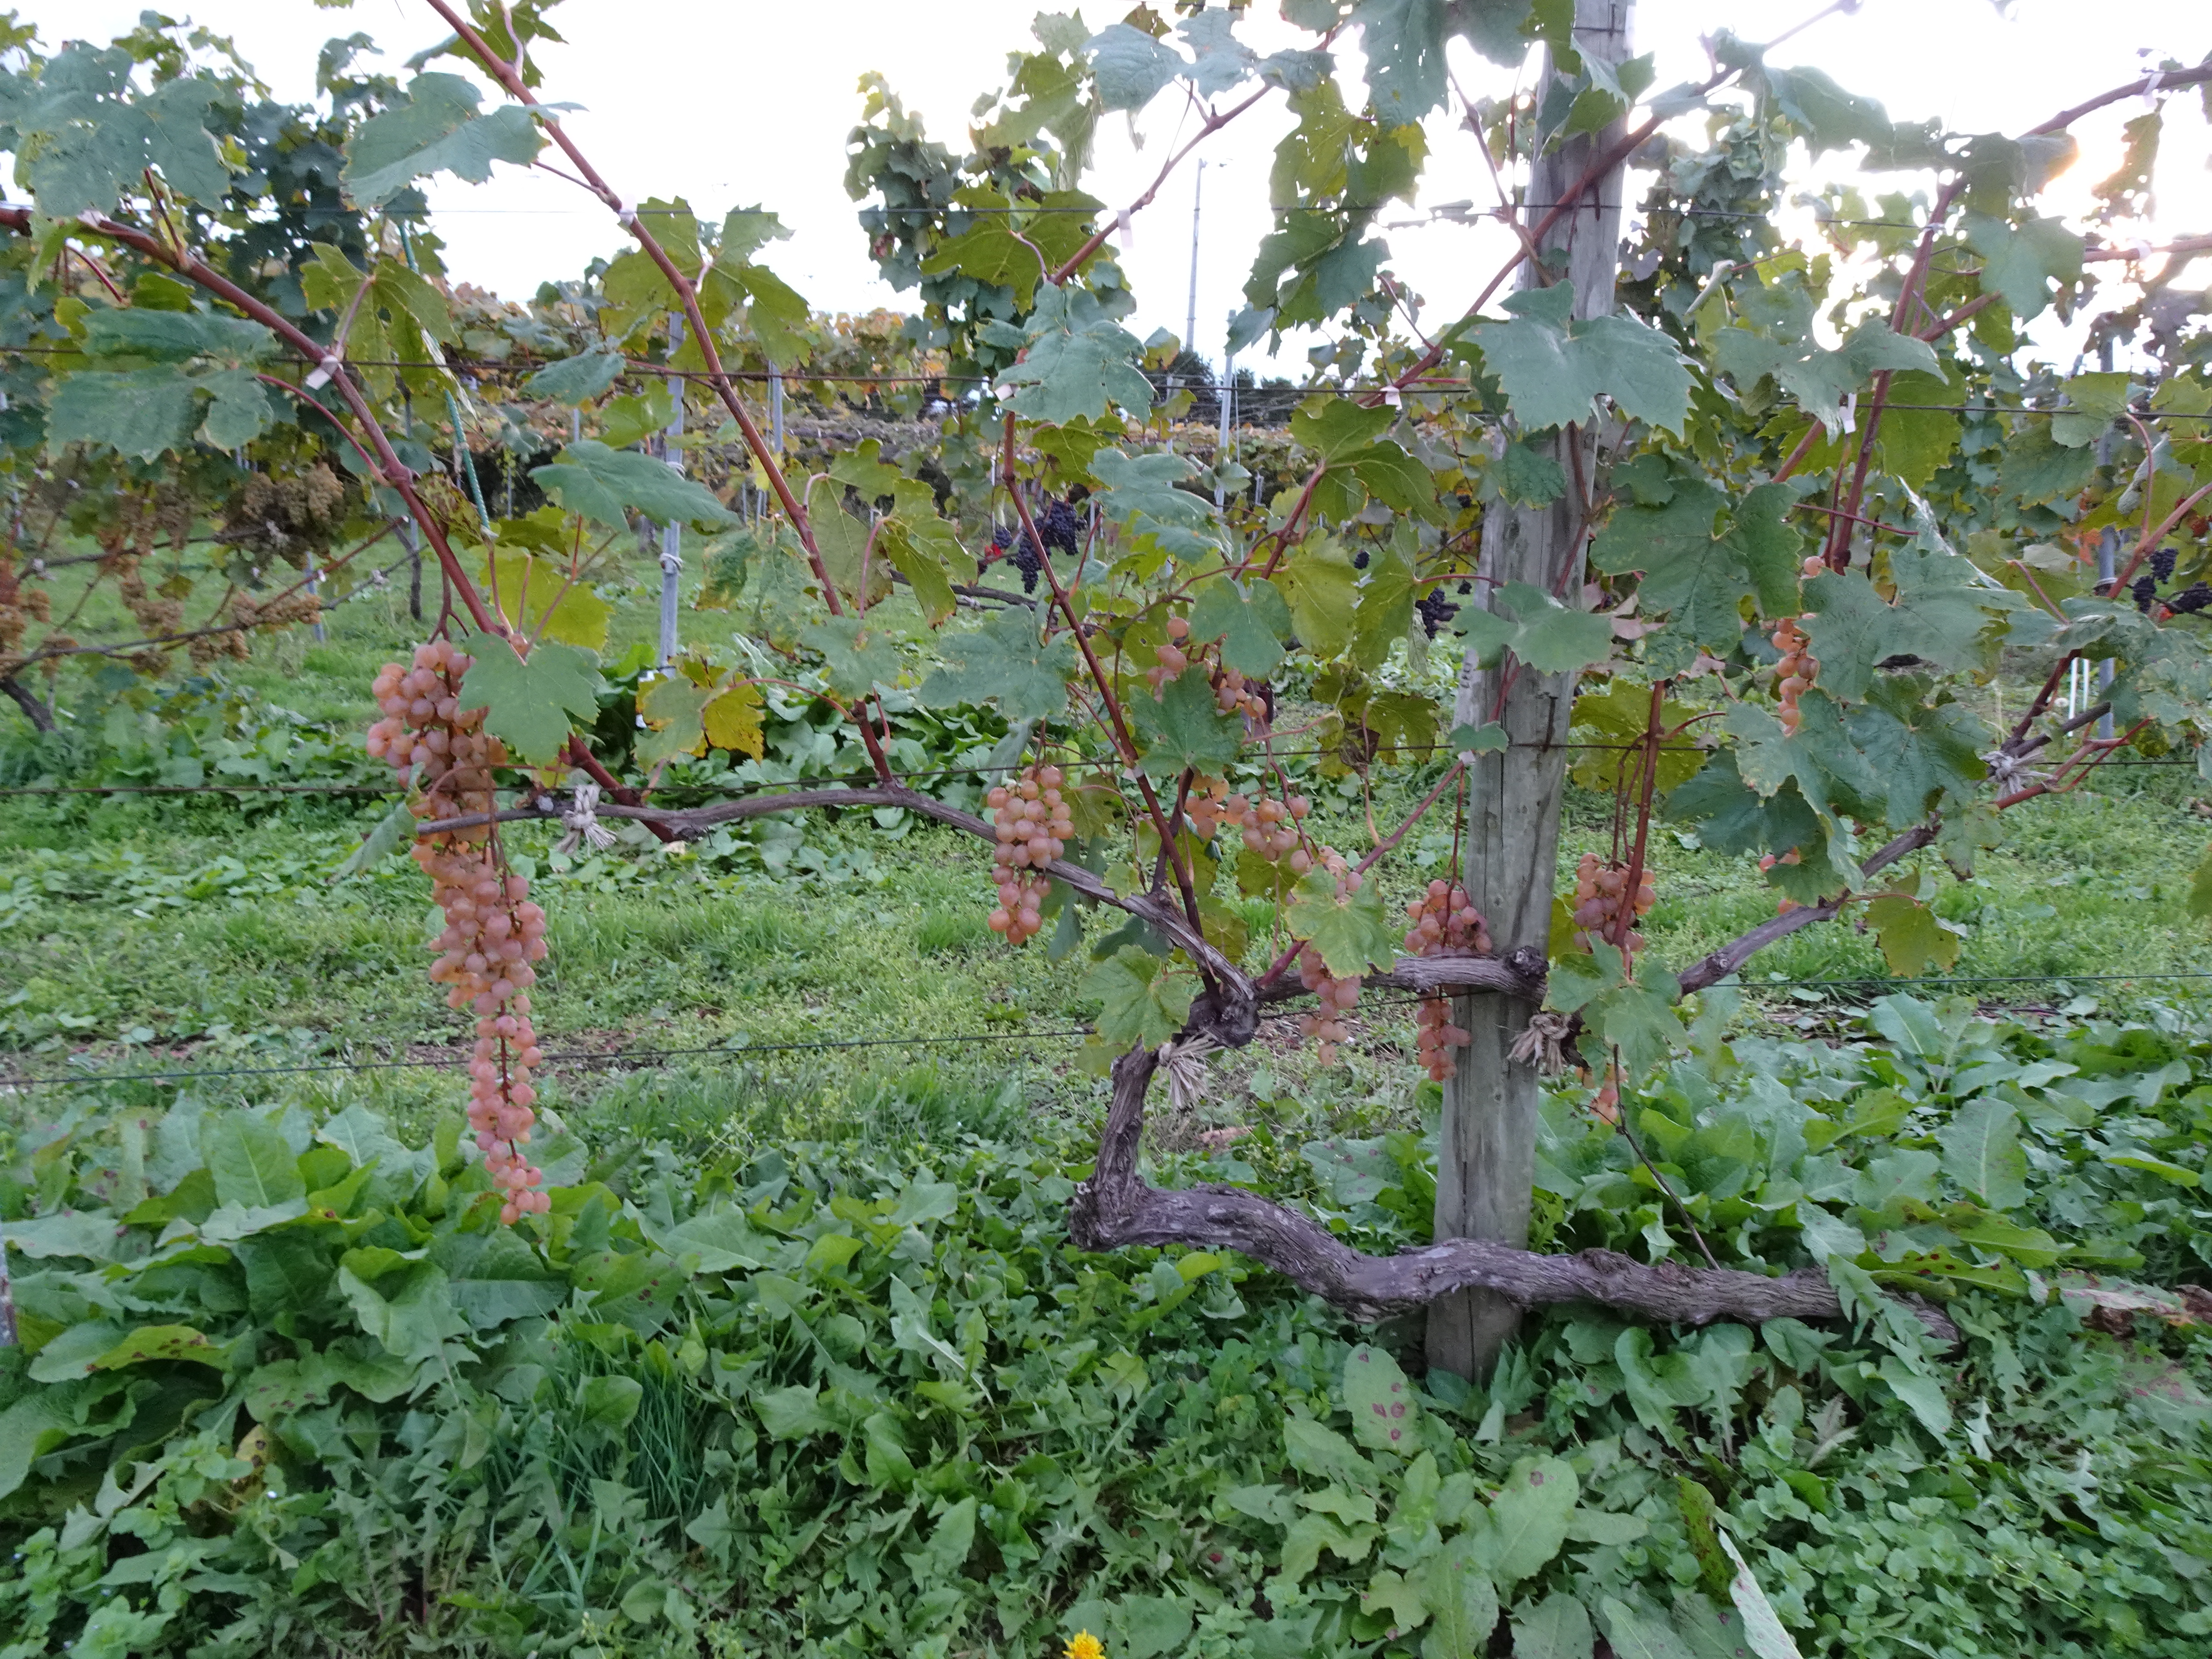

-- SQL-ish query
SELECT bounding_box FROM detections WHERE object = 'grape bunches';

[1573,1052,1631,1125]
[1216,661,1275,724]
[1040,495,1083,557]
[2166,580,2209,616]
[2130,570,2158,616]
[2147,546,2179,582]
[365,640,505,951]
[1007,517,1045,597]
[1177,769,1245,840]
[28,582,59,625]
[0,601,28,689]
[1769,553,1840,735]
[1298,939,1364,1069]
[303,462,347,529]
[154,483,198,549]
[227,587,263,626]
[1755,849,1803,919]
[1565,854,1658,969]
[423,861,553,1230]
[135,600,184,638]
[190,630,254,667]
[985,760,1079,948]
[1402,873,1495,1084]
[117,489,163,559]
[275,480,306,521]
[1411,583,1459,648]
[238,468,273,521]
[1238,793,1365,908]
[1146,615,1193,705]
[265,590,325,629]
